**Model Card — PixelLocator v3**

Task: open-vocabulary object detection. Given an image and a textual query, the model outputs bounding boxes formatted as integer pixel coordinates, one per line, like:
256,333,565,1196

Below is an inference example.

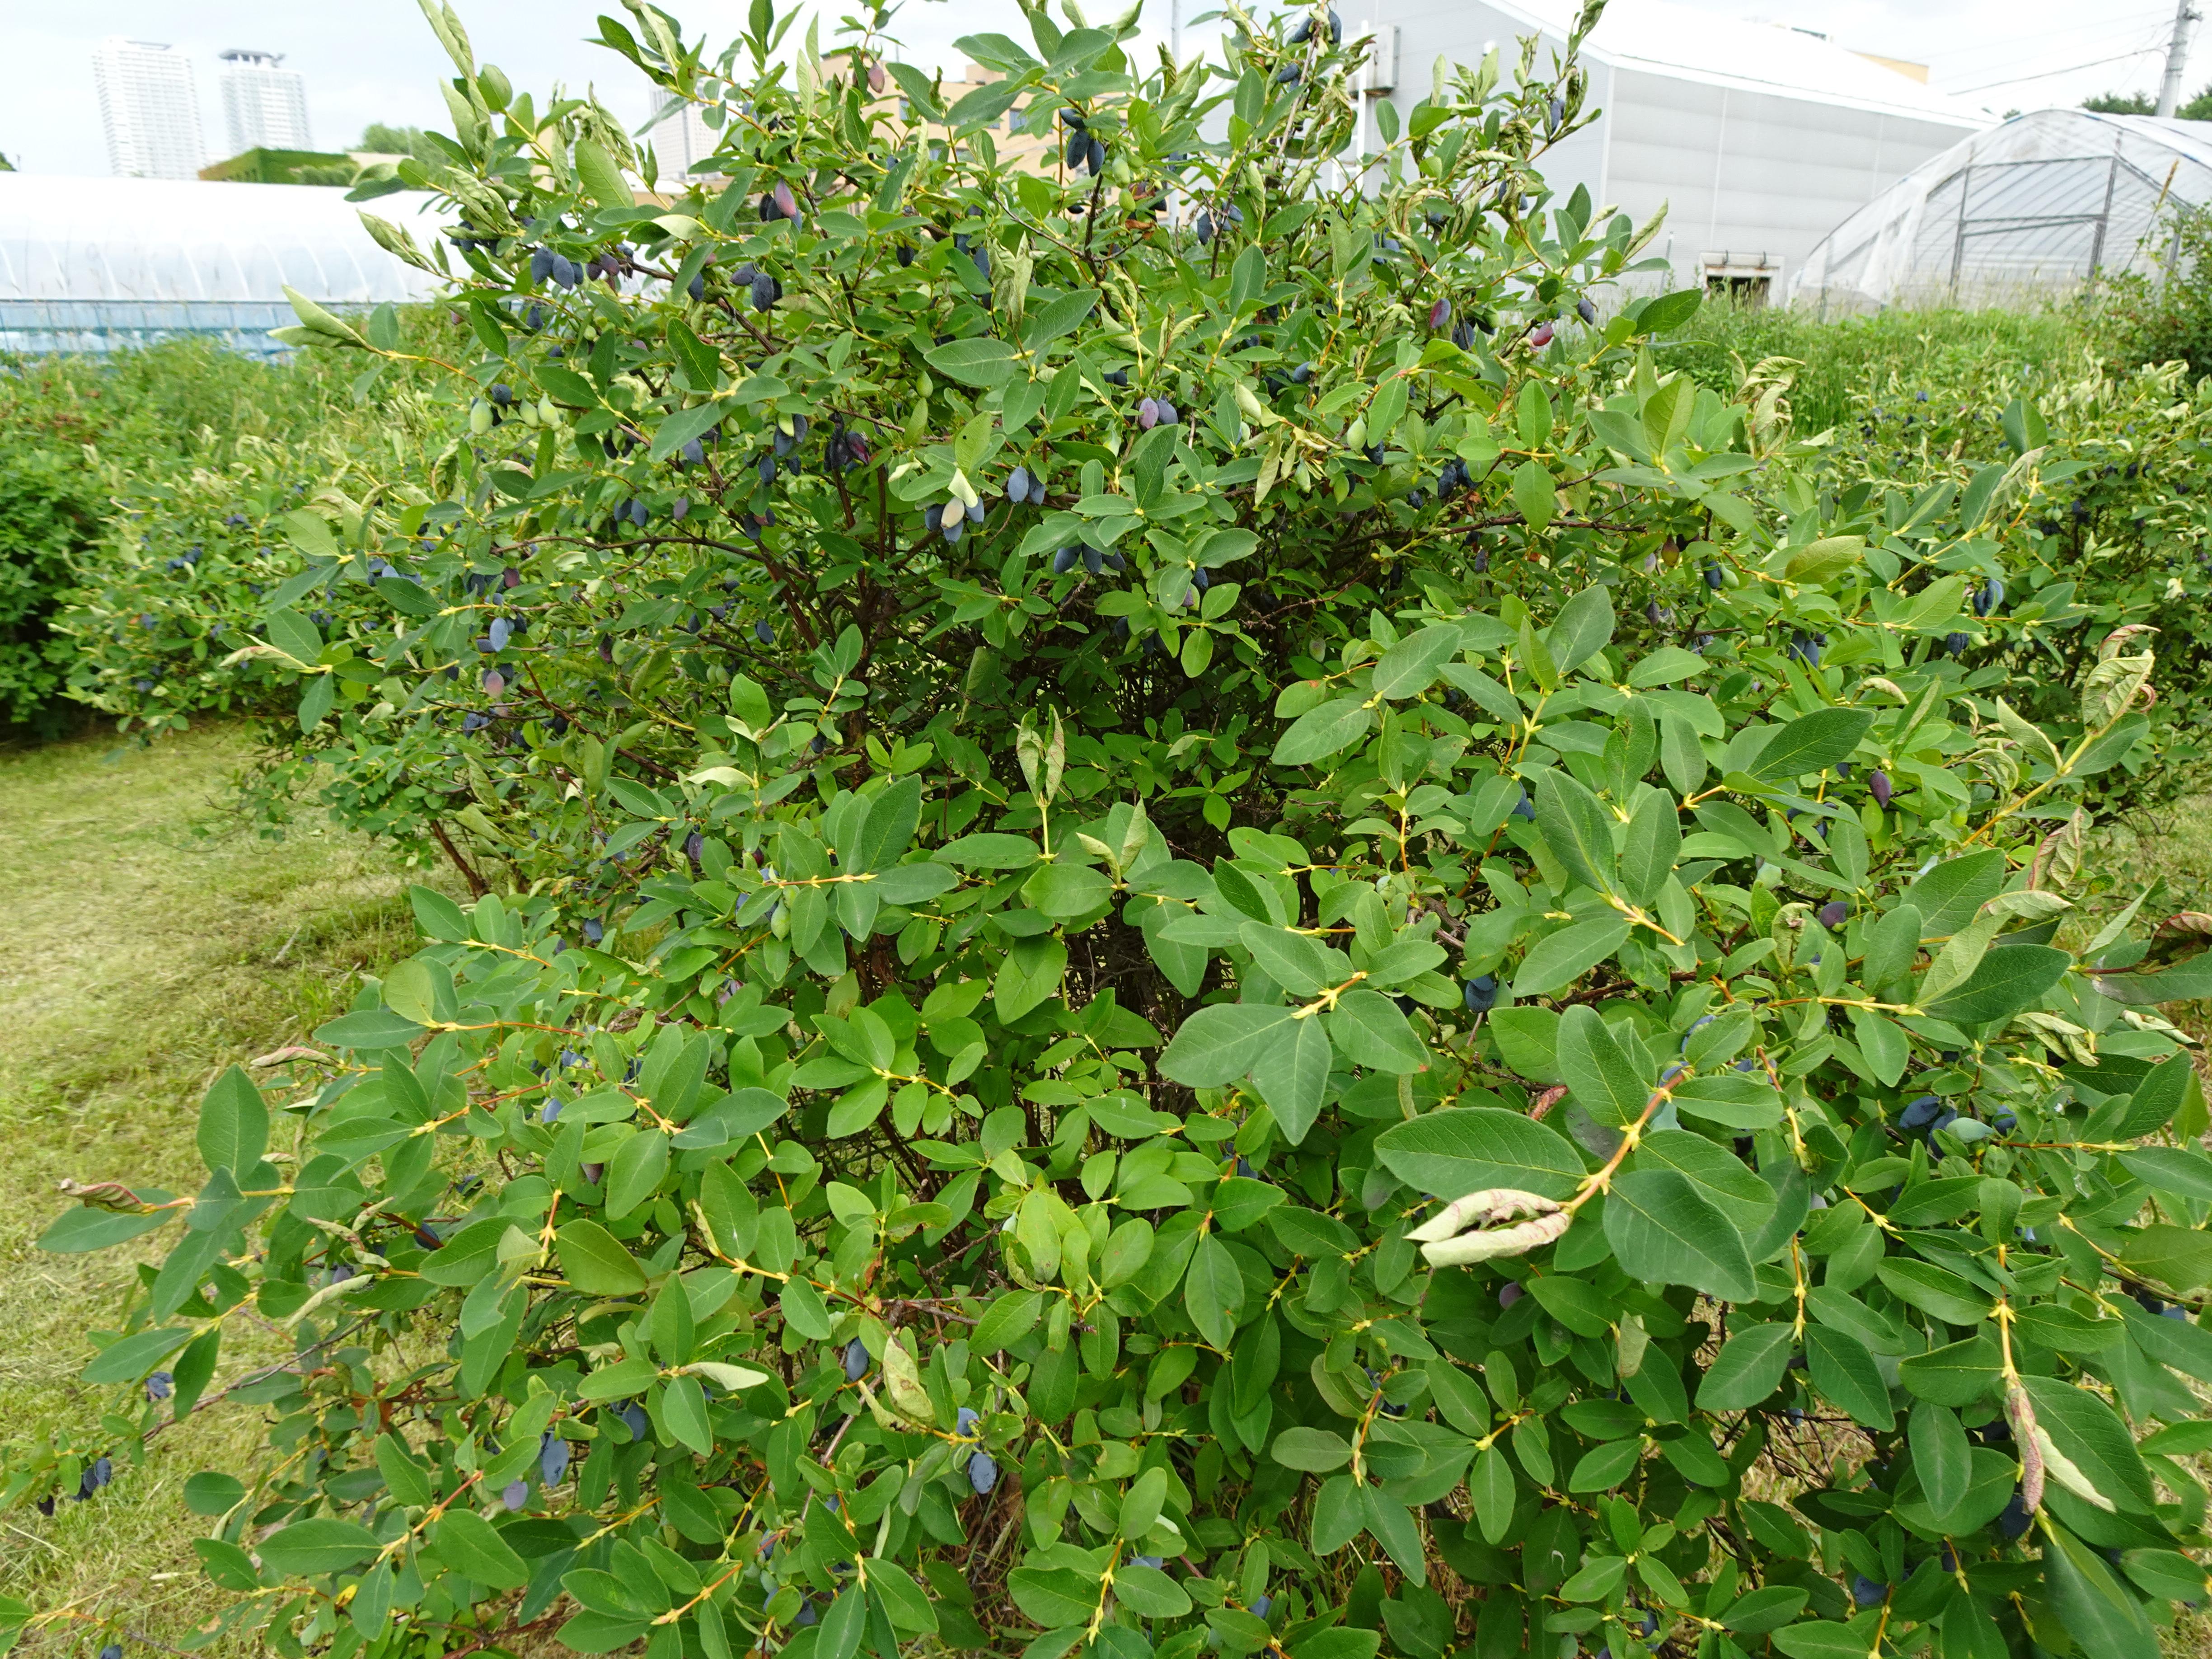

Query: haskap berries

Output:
570,261,584,286
717,665,732,685
1984,1422,2015,1443
712,421,724,443
1315,301,1334,319
760,194,774,220
967,204,984,216
529,245,553,288
1409,386,1417,398
865,61,885,94
699,1382,714,1406
81,1467,98,1493
368,569,384,587
1466,970,1496,991
1382,229,1401,252
1969,632,1988,648
1555,310,1563,320
1114,617,1132,641
553,256,577,291
1153,200,1168,213
1476,316,1495,334
1027,469,1050,507
687,612,704,634
764,507,777,526
1553,98,1565,117
1061,126,1090,169
581,1162,606,1184
1112,244,1123,261
600,633,616,663
1518,192,1529,211
1139,395,1159,432
1647,600,1660,626
1272,367,1287,396
585,678,604,697
1510,797,1538,822
1971,583,1990,617
1245,321,1261,348
753,847,766,868
594,252,622,278
1268,303,1279,319
1135,545,1150,568
1818,900,1853,926
1578,299,1597,327
1786,809,1828,837
611,640,626,665
791,207,804,231
768,278,783,302
1446,689,1461,701
438,709,453,724
1103,372,1116,384
384,564,399,579
539,345,565,369
1238,1154,1259,1180
1158,397,1182,427
586,578,602,595
496,234,514,257
1570,315,1578,325
1753,682,1760,690
1051,538,1081,575
790,1591,819,1626
472,573,486,596
725,418,741,437
823,1492,844,1513
1647,1103,1682,1132
612,492,632,521
1004,1215,1022,1232
1945,631,1967,654
758,453,776,484
941,494,968,528
1755,861,1784,888
1896,1095,1944,1128
760,1526,782,1555
704,254,719,266
915,371,934,398
957,233,974,254
425,540,439,552
1278,62,1301,82
603,427,620,459
1451,324,1460,343
554,937,566,954
656,593,665,598
1643,553,1660,577
981,293,995,310
1619,561,1634,580
1426,212,1445,222
1939,1542,1964,1573
762,114,780,131
943,519,965,545
729,260,760,286
828,411,845,440
480,715,495,729
1499,1280,1530,1308
706,604,727,619
1132,181,1151,198
1186,583,1204,612
1427,299,1454,328
1491,974,1514,1011
570,1053,586,1066
773,425,792,459
628,1057,643,1080
490,384,514,401
1997,1491,2035,1543
772,178,798,218
1123,631,1143,655
739,102,759,122
1088,308,1096,318
527,755,540,771
2160,1306,2193,1321
684,268,707,303
760,1570,783,1592
1870,770,1894,808
1789,629,1808,659
503,1477,532,1511
451,309,463,324
366,558,387,573
543,1099,564,1125
967,494,986,523
1785,1406,1806,1426
838,1578,848,1593
416,1220,444,1251
744,450,761,468
689,691,702,707
768,900,796,940
1873,817,1896,854
1143,632,1157,656
784,452,806,481
585,917,605,944
616,246,635,278
1695,632,1715,644
1059,108,1088,130
1370,233,1387,266
522,545,542,559
1951,806,1969,826
724,656,737,675
335,1263,353,1287
1325,9,1342,42
146,1378,170,1398
1735,1059,1754,1073
1558,1632,1582,1659
1458,322,1476,351
499,662,516,684
387,1314,402,1341
1940,1049,1960,1064
1899,810,1922,839
470,639,498,653
798,197,814,214
791,413,809,445
1993,1104,2019,1133
2117,1278,2146,1299
1745,635,1770,646
1681,1015,1717,1056
1474,548,1489,572
1234,382,1264,422
37,1493,56,1518
450,220,469,247
1250,1595,1275,1618
762,1587,782,1612
1332,474,1350,506
1069,204,1086,214
1344,469,1356,498
1498,178,1512,202
809,733,826,755
464,711,483,738
518,400,539,426
1735,1129,1754,1156
445,665,461,683
1485,305,1501,328
2137,1291,2165,1314
688,832,706,860
1802,636,1824,670
485,670,505,700
514,729,528,746
412,1403,424,1420
1530,324,1555,345
1007,469,1030,504
1218,216,1234,234
673,497,690,521
544,1435,567,1490
554,715,571,737
588,260,603,283
1661,534,1680,569
1407,489,1425,509
486,574,507,591
1195,212,1215,247
620,437,633,459
727,599,737,609
1702,555,1722,591
783,884,802,908
752,268,773,314
1155,629,1171,653
970,1452,1007,1495
1309,636,1328,662
485,593,506,607
316,1269,348,1311
1127,154,1146,169
1180,590,1193,608
537,394,562,432
523,216,535,225
970,244,991,281
1836,763,1850,777
1363,431,1385,468
1861,795,1885,837
711,1046,729,1069
401,571,426,585
735,891,751,910
1323,256,1334,273
151,1372,176,1383
1414,1195,1436,1218
1462,462,1480,489
845,432,875,468
1715,558,1740,591
1928,1111,1961,1158
1144,1554,1163,1572
1079,539,1103,577
456,1175,485,1195
1852,1573,1887,1606
741,512,761,539
1129,1557,1151,1567
705,663,720,682
1289,74,1304,93
953,1405,981,1433
1389,563,1404,585
490,399,507,426
1191,566,1211,590
924,497,943,531
821,438,849,474
590,511,609,533
1087,139,1108,177
1340,511,1356,522
1109,152,1131,186
885,156,899,170
726,580,742,589
1639,1611,1659,1636
1375,873,1399,900
1471,531,1479,540
896,243,915,266
1364,1367,1374,1377
489,240,504,257
581,1024,596,1032
562,1045,575,1065
621,545,635,559
1466,981,1496,1013
1347,416,1367,451
941,333,958,343
1238,421,1252,443
839,1560,853,1572
1141,559,1156,580
1113,371,1130,386
399,1315,414,1331
1221,202,1246,222
416,522,431,535
489,618,509,654
2017,1226,2040,1244
583,325,600,342
462,223,477,251
1547,102,1560,131
1437,466,1459,497
96,1458,111,1491
1168,152,1185,171
467,397,492,438
760,867,782,882
1943,1117,1989,1141
1758,1058,1778,1084
846,1341,873,1385
1329,866,1344,875
519,296,545,334
715,986,733,1005
1656,1061,1690,1087
621,1402,650,1442
1986,580,2004,605
744,1563,764,1577
504,565,522,590
1295,457,1311,494
605,837,627,862
1291,16,1319,44
1677,534,1701,550
1807,1190,1830,1212
630,498,648,527
768,200,781,220
70,1489,87,1503
1291,361,1319,383
627,339,651,376
755,620,775,645
1101,537,1130,574
680,436,706,467
778,411,797,436
755,514,769,526
508,608,531,636
1118,188,1136,212
530,1060,547,1075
